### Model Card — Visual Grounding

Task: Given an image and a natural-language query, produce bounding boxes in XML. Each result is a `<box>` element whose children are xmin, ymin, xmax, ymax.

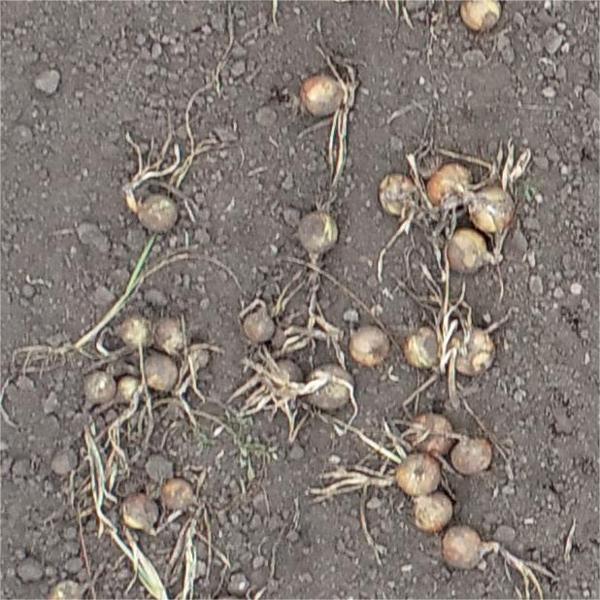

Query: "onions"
<box><xmin>467</xmin><ymin>190</ymin><xmax>509</xmax><ymax>232</ymax></box>
<box><xmin>451</xmin><ymin>438</ymin><xmax>489</xmax><ymax>474</ymax></box>
<box><xmin>459</xmin><ymin>0</ymin><xmax>501</xmax><ymax>32</ymax></box>
<box><xmin>139</xmin><ymin>194</ymin><xmax>178</xmax><ymax>233</ymax></box>
<box><xmin>400</xmin><ymin>328</ymin><xmax>437</xmax><ymax>367</ymax></box>
<box><xmin>460</xmin><ymin>331</ymin><xmax>494</xmax><ymax>372</ymax></box>
<box><xmin>299</xmin><ymin>76</ymin><xmax>339</xmax><ymax>117</ymax></box>
<box><xmin>267</xmin><ymin>358</ymin><xmax>304</xmax><ymax>389</ymax></box>
<box><xmin>379</xmin><ymin>174</ymin><xmax>420</xmax><ymax>217</ymax></box>
<box><xmin>440</xmin><ymin>525</ymin><xmax>482</xmax><ymax>570</ymax></box>
<box><xmin>427</xmin><ymin>163</ymin><xmax>468</xmax><ymax>203</ymax></box>
<box><xmin>444</xmin><ymin>228</ymin><xmax>487</xmax><ymax>271</ymax></box>
<box><xmin>412</xmin><ymin>492</ymin><xmax>450</xmax><ymax>531</ymax></box>
<box><xmin>120</xmin><ymin>494</ymin><xmax>156</xmax><ymax>530</ymax></box>
<box><xmin>348</xmin><ymin>324</ymin><xmax>388</xmax><ymax>366</ymax></box>
<box><xmin>396</xmin><ymin>453</ymin><xmax>438</xmax><ymax>495</ymax></box>
<box><xmin>296</xmin><ymin>212</ymin><xmax>339</xmax><ymax>252</ymax></box>
<box><xmin>144</xmin><ymin>353</ymin><xmax>176</xmax><ymax>392</ymax></box>
<box><xmin>47</xmin><ymin>579</ymin><xmax>80</xmax><ymax>599</ymax></box>
<box><xmin>242</xmin><ymin>309</ymin><xmax>273</xmax><ymax>340</ymax></box>
<box><xmin>306</xmin><ymin>366</ymin><xmax>348</xmax><ymax>410</ymax></box>
<box><xmin>116</xmin><ymin>374</ymin><xmax>140</xmax><ymax>401</ymax></box>
<box><xmin>119</xmin><ymin>317</ymin><xmax>152</xmax><ymax>348</ymax></box>
<box><xmin>83</xmin><ymin>371</ymin><xmax>115</xmax><ymax>403</ymax></box>
<box><xmin>406</xmin><ymin>412</ymin><xmax>453</xmax><ymax>456</ymax></box>
<box><xmin>157</xmin><ymin>477</ymin><xmax>193</xmax><ymax>513</ymax></box>
<box><xmin>152</xmin><ymin>315</ymin><xmax>186</xmax><ymax>352</ymax></box>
